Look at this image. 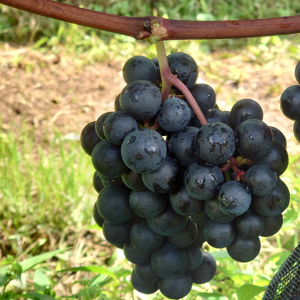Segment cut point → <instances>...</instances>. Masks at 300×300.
Here are the masks:
<instances>
[{"instance_id": "cut-point-1", "label": "cut point", "mask_w": 300, "mask_h": 300, "mask_svg": "<svg viewBox=\"0 0 300 300\" xmlns=\"http://www.w3.org/2000/svg\"><path fill=\"white\" fill-rule=\"evenodd\" d=\"M153 44H155V51L160 67L162 80V102H164L166 99H168V94L170 91L171 72L169 70L164 41L156 40Z\"/></svg>"}]
</instances>
